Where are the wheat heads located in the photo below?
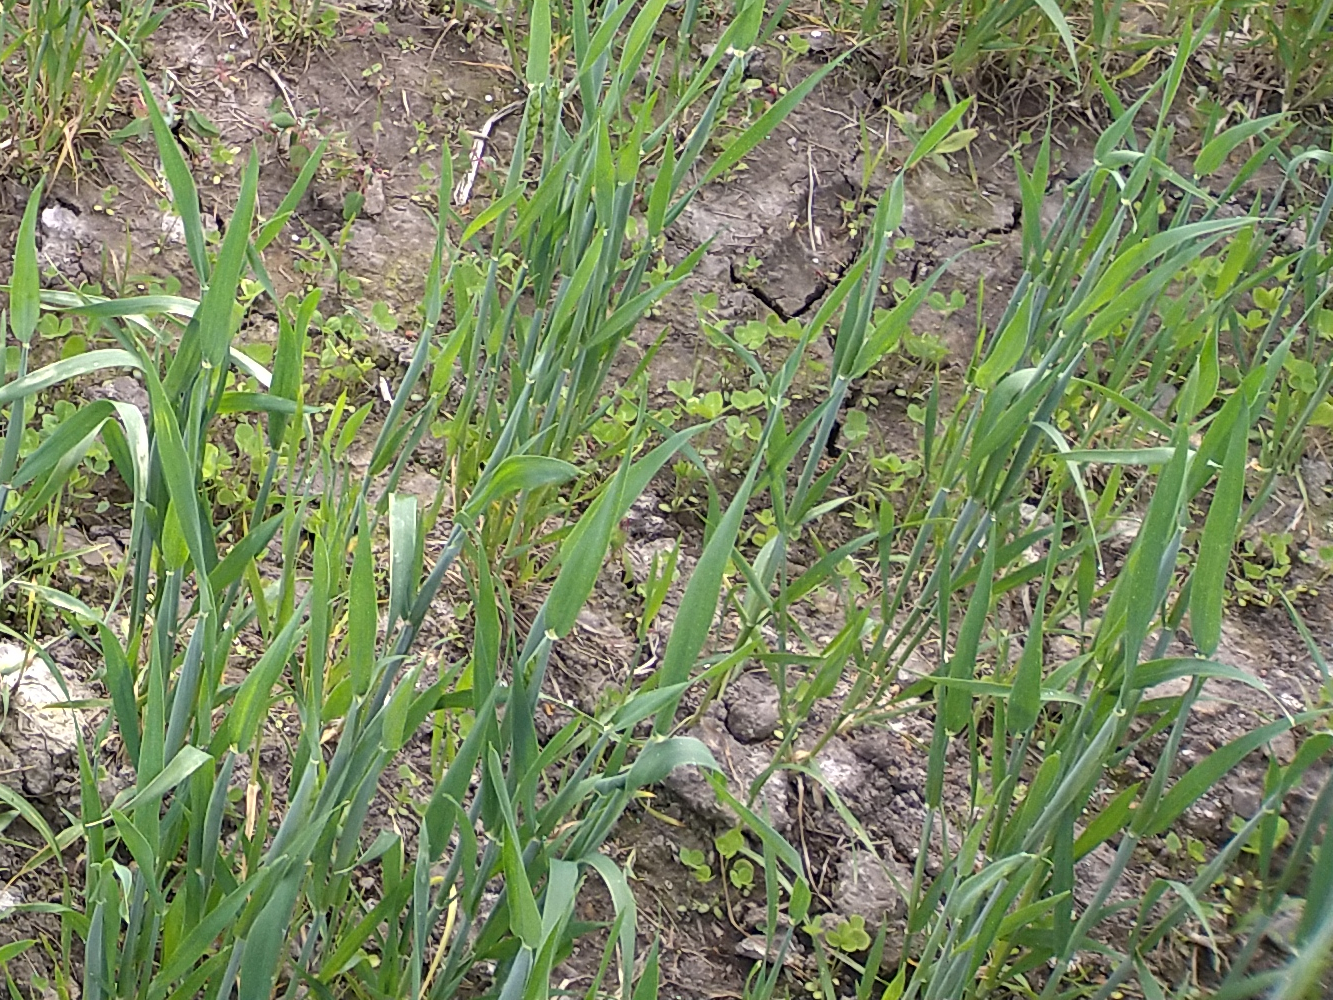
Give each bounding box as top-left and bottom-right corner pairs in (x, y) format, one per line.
(717, 55), (745, 130)
(543, 76), (561, 148)
(521, 89), (539, 158)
